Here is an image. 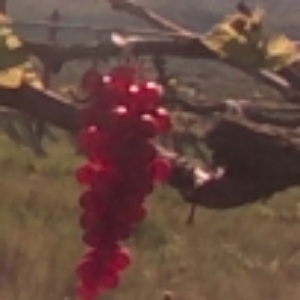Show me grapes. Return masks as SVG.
<instances>
[{"mask_svg": "<svg viewBox=\"0 0 300 300\" xmlns=\"http://www.w3.org/2000/svg\"><path fill=\"white\" fill-rule=\"evenodd\" d=\"M82 83L94 93L75 113L80 128L73 142L88 157L78 165L76 176L90 185L79 197L83 211L78 224L88 247L75 267L80 280L75 294L79 300H96L100 290L117 287L120 271L129 263L117 242L126 237L128 226L145 218L144 197L153 181H165L174 172L172 161L147 140L167 131L172 117L158 106L165 98L163 84L146 79L138 86L123 65L107 74L91 67Z\"/></svg>", "mask_w": 300, "mask_h": 300, "instance_id": "1", "label": "grapes"}]
</instances>
